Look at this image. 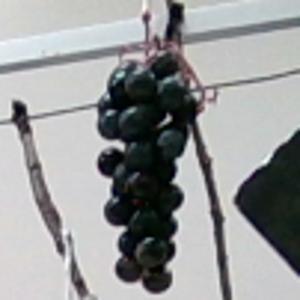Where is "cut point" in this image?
<instances>
[{
	"label": "cut point",
	"mask_w": 300,
	"mask_h": 300,
	"mask_svg": "<svg viewBox=\"0 0 300 300\" xmlns=\"http://www.w3.org/2000/svg\"><path fill=\"white\" fill-rule=\"evenodd\" d=\"M151 0H142L141 3V15L140 22L144 27V58L143 63L146 61L147 55H149V32H150V23L152 22V13H151Z\"/></svg>",
	"instance_id": "cut-point-1"
}]
</instances>
